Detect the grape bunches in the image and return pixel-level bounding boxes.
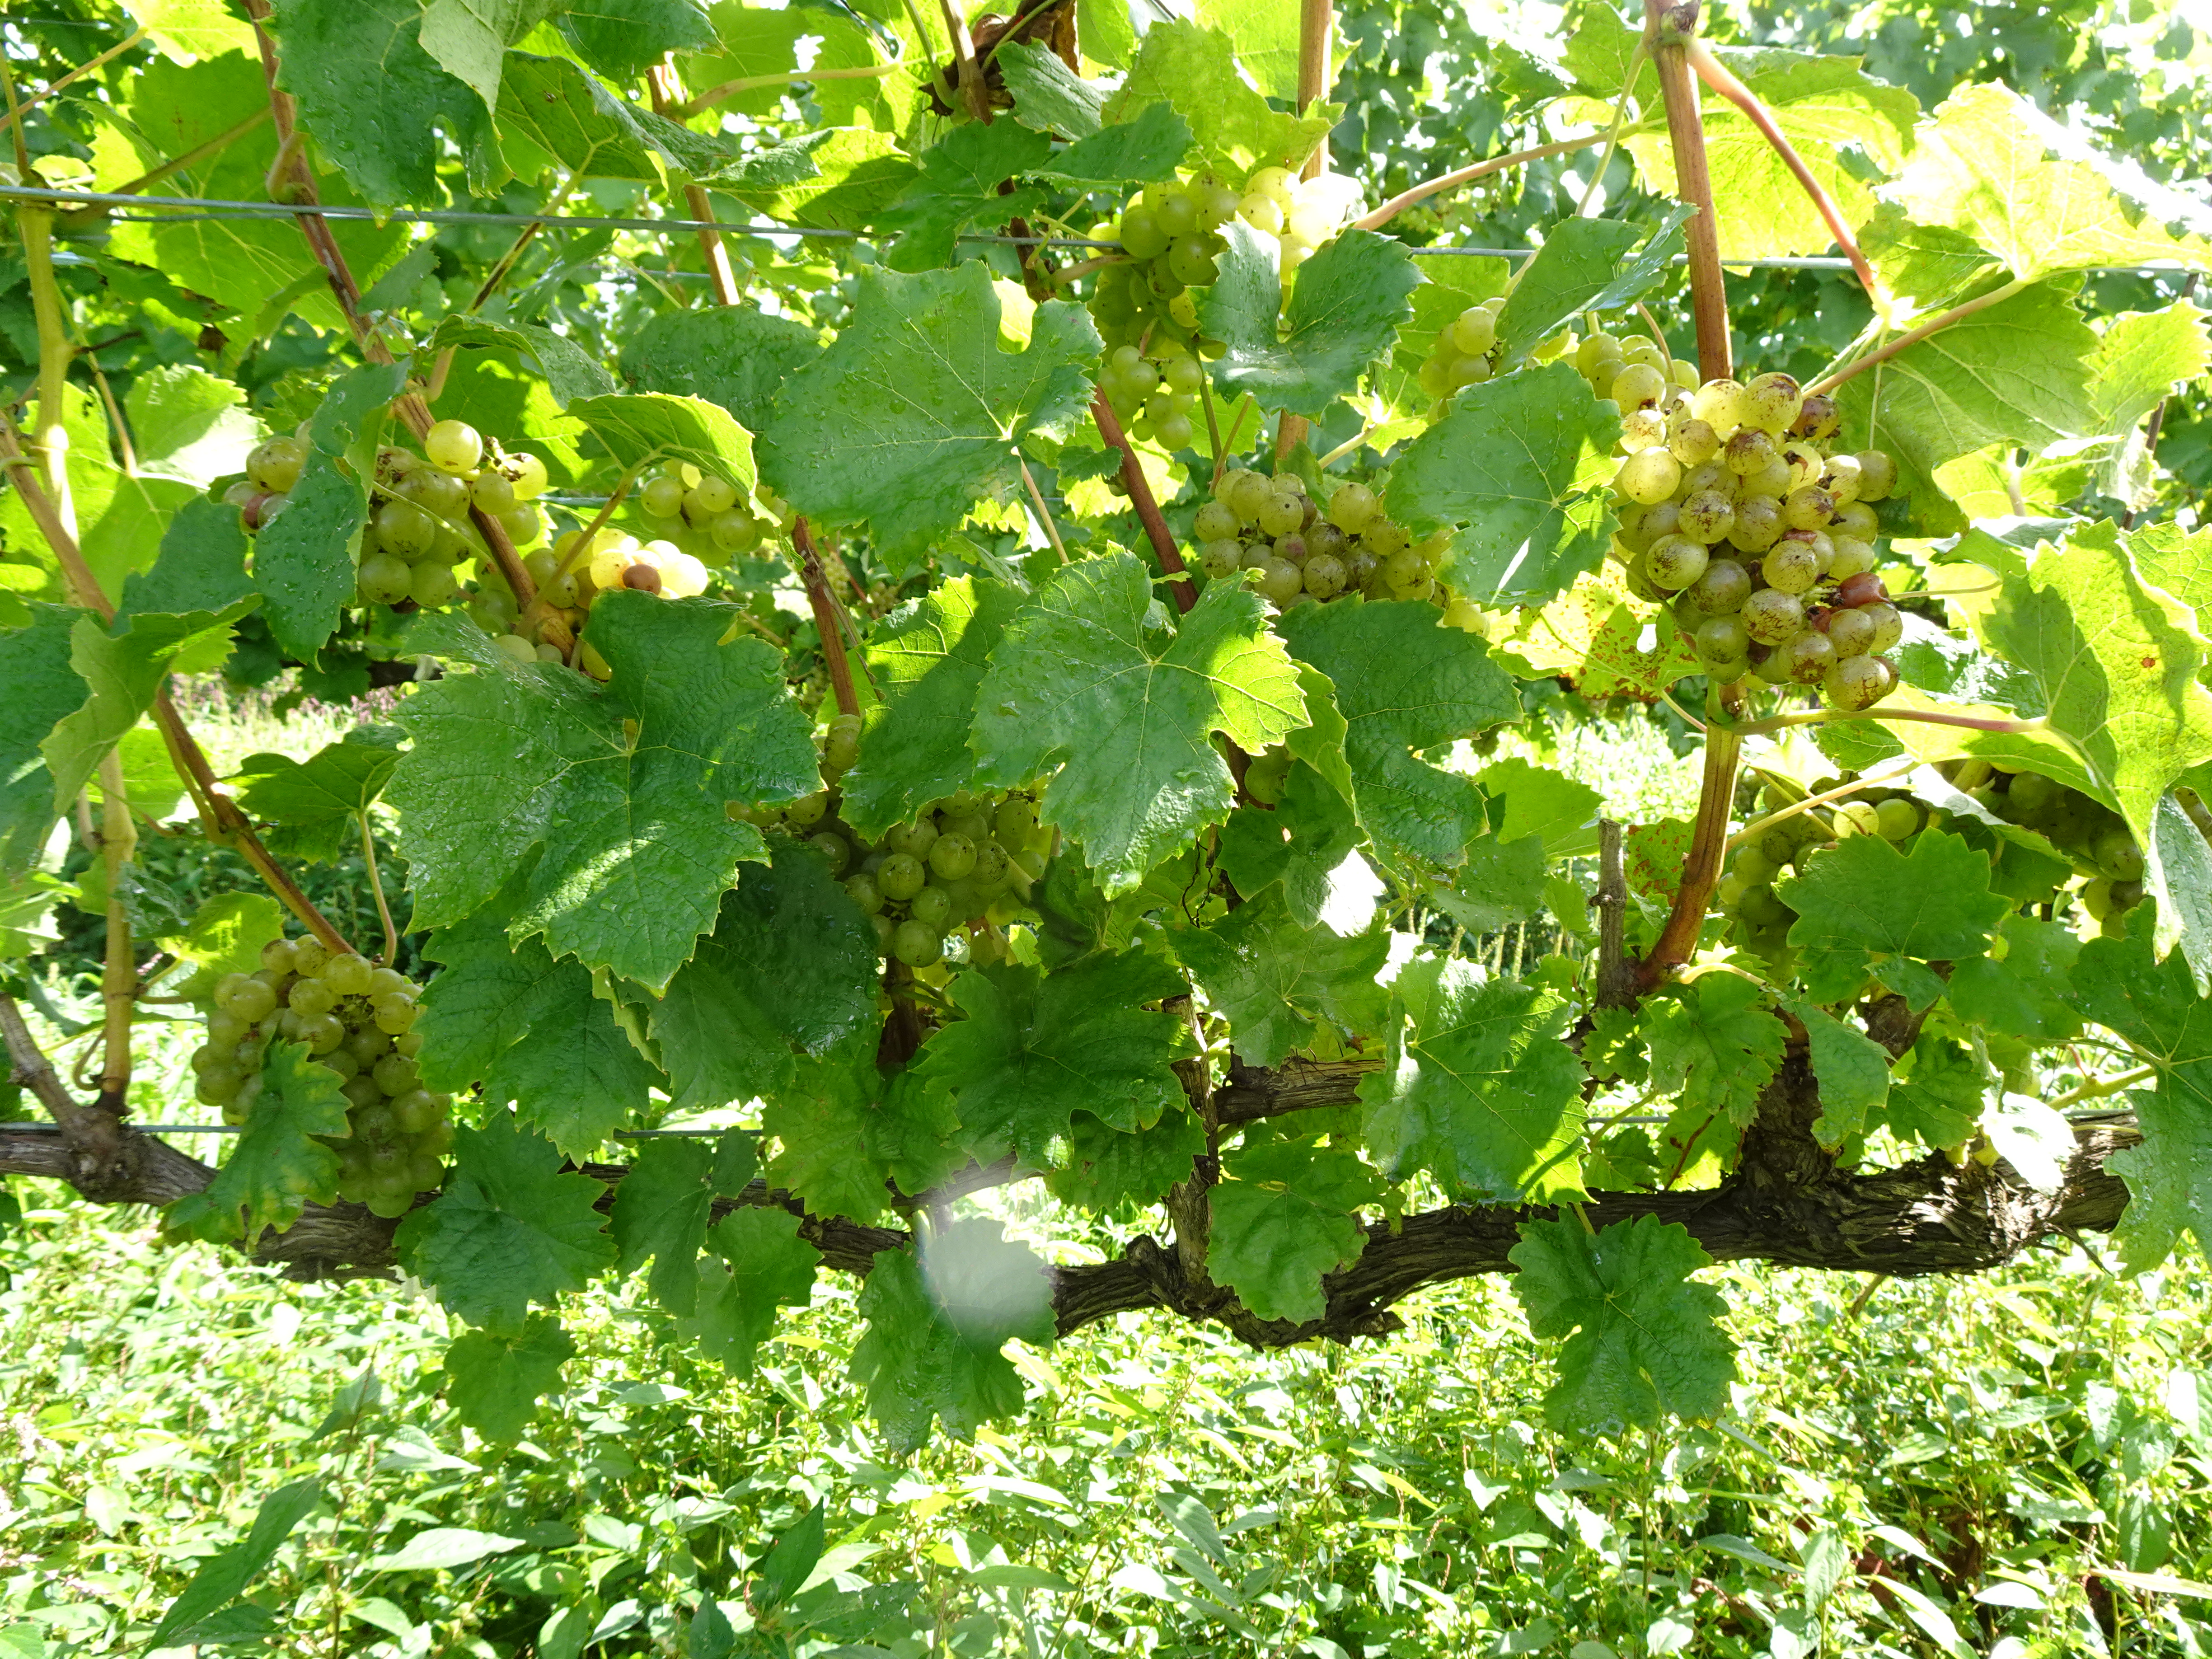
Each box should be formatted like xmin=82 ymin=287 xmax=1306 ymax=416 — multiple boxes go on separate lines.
xmin=469 ymin=530 xmax=707 ymax=680
xmin=845 ymin=785 xmax=1056 ymax=968
xmin=1707 ymin=771 xmax=1892 ymax=985
xmin=2041 ymin=771 xmax=2212 ymax=941
xmin=1121 ymin=165 xmax=1346 ymax=359
xmin=728 ymin=714 xmax=867 ymax=878
xmin=1085 ymin=189 xmax=1167 ymax=364
xmin=635 ymin=457 xmax=797 ymax=569
xmin=191 ymin=935 xmax=457 ymax=1219
xmin=354 ymin=420 xmax=547 ymax=607
xmin=1833 ymin=759 xmax=2050 ymax=844
xmin=220 ymin=418 xmax=316 ymax=536
xmin=1192 ymin=468 xmax=1489 ymax=805
xmin=1418 ymin=298 xmax=1569 ymax=427
xmin=1558 ymin=332 xmax=1701 ymax=416
xmin=1608 ymin=371 xmax=1900 ymax=712
xmin=1097 ymin=345 xmax=1205 ymax=451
